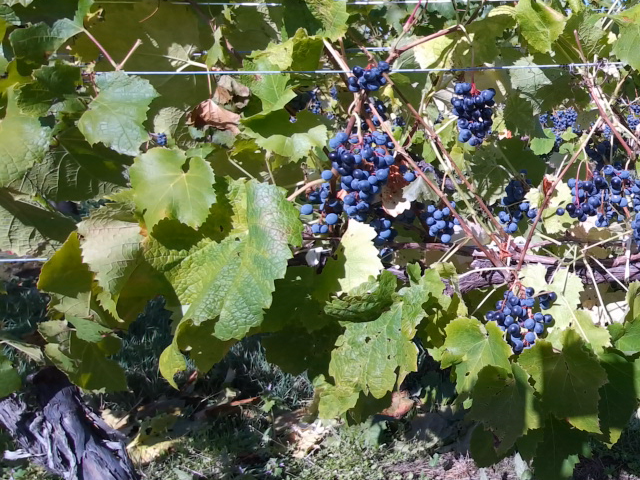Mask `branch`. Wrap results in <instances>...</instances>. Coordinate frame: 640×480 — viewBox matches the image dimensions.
Instances as JSON below:
<instances>
[{
    "mask_svg": "<svg viewBox=\"0 0 640 480\" xmlns=\"http://www.w3.org/2000/svg\"><path fill=\"white\" fill-rule=\"evenodd\" d=\"M382 77L385 79V81L390 84L392 90L396 93L397 97L399 98V100L401 101V103L408 109L409 112L413 113L416 117V119L420 122V124L423 126V128L427 131L428 135L430 136L428 138V142L430 147L432 148L433 152L436 155V158L439 161V164L442 168V170L444 171L446 177L448 178V180L451 182V184L455 187V189L457 190L460 198L465 202V204L467 205V207L469 208L472 217L475 220V223L484 231L486 232L487 236L492 240V242L499 248L500 251L504 250V246L503 244L494 236V234L491 232V230L485 226L476 210L474 205L470 202L469 198L465 195L464 191L462 190L461 186L458 184V182L454 179V177L452 176L450 170L448 169L447 165L445 164V161L443 159V157L441 156V154L447 159V161L449 162L450 166L456 171L458 172V174L462 177L464 183L466 184L468 190L470 191V193L473 195V197L475 198L477 204L479 205V207L481 208V210L486 214L487 218L489 219V221L491 222V224L498 229L499 235L510 244L511 247H513L515 249L516 252H519L521 254V258L518 261L516 267L514 268V270L512 271V278H515L518 274V272L520 271L522 265H523V261L525 259V255L526 252L530 246L531 243V238L534 232L535 227L538 225V222L540 220L541 214L545 208V206L547 205V203L549 202V199L551 198L552 194L554 193L556 187L559 185V183L561 182V180L564 178V175L566 174V172L569 170V168L571 167V165L574 163V161L580 156V154L584 151V149L587 147L588 143L590 142L594 132L597 129L598 123L603 120L605 122V124L607 125V127L609 128L610 132L612 135H614L617 139H619V141L621 142L624 150L626 151V153L628 154V156L630 157V159L632 161L636 160V156L633 153V151L630 149L626 139L618 132L615 130L612 122L608 119V117L606 116V114L602 111L600 103H599V99L597 98V95L595 93V90L593 88V86L588 82L587 79H583L582 83L584 84V86L588 89L591 98L594 102L596 111L598 113L599 116H597L592 124V127L590 128V130L587 133V136L585 137L584 142L580 145V147L575 151V153L571 156V158L567 161V163L565 164V166L562 168L561 172L559 173V175L557 176V178L555 179V181L553 182V184L550 186L549 190L547 191L543 201L541 202L539 208L536 211L534 220L532 222V224L529 227V230L527 232L526 238H525V243L524 246L521 248L519 247L509 236H507L504 232V229L502 227L501 224H499L495 218L492 216L491 212L488 210V208L486 207V205L483 203L482 199L480 198V196L478 195V193L476 192V190L473 188L471 181L469 180L468 176L466 175V173L454 162L453 158L450 156V154L444 149V147L442 146L441 142L439 141L438 137L435 135V133L433 132L432 128L425 122V120L423 119V117L420 115L419 111L416 110L415 108H413L408 102L407 100L404 98L403 94L401 93V91L399 90V88L397 87V85L395 84V82L390 78V76L386 73L383 72L382 73Z\"/></svg>",
    "mask_w": 640,
    "mask_h": 480,
    "instance_id": "branch-1",
    "label": "branch"
},
{
    "mask_svg": "<svg viewBox=\"0 0 640 480\" xmlns=\"http://www.w3.org/2000/svg\"><path fill=\"white\" fill-rule=\"evenodd\" d=\"M369 95H370V91L369 90L364 91L363 94L361 95L356 108L353 110L352 114L350 115L349 124H348V126L346 128V133L347 134L351 133V131L353 129V126H354L355 118L360 112H361V119L363 121L367 122L368 127L372 131L376 130V127L374 126L371 118L366 114V109L364 108V105L366 104L368 109H369V111L380 122L383 131L385 132L388 140L390 141L391 145L395 148L397 153L406 161V163L410 166V168L413 169L417 173V175L421 179H423L433 189V191L438 196V198L440 200H442L444 202V204L447 206V209L450 211L451 215L454 216L458 220L460 226L466 232V234L468 235L469 239L476 246H478L482 252L485 253V257H487L494 264H496L498 268H501L502 267V262L500 260H498L496 257H494L490 252H488L485 249L484 245L481 244V242L473 235L472 231L468 228V226L466 225V223L463 220L462 216L457 211H455V209L453 208L451 202L442 194V192L437 187V185L433 181H431L430 178L427 177L420 170V168L416 164L413 163V161L407 156V154L402 150V148L396 143V141L393 138L388 126L386 125L385 120L381 117L380 113L373 107V104L371 103L370 99L368 98Z\"/></svg>",
    "mask_w": 640,
    "mask_h": 480,
    "instance_id": "branch-2",
    "label": "branch"
},
{
    "mask_svg": "<svg viewBox=\"0 0 640 480\" xmlns=\"http://www.w3.org/2000/svg\"><path fill=\"white\" fill-rule=\"evenodd\" d=\"M463 27H464V24H463V23H458V24H456V25H454V26L446 27V28H444V29H442V30H439V31L435 32L434 34H432V35H430V36H428V37H426V38H423V39H420V40H418V41H415V42H412V43L406 44V45H404V46L400 47L399 49H395V50H393V51L389 54V56L386 58V62H387L388 64H391V63L394 61V59H395L396 57H398L400 54H402L404 51H406V50H408V49H412V48L417 47V46H420V45H422V44L429 43V42H431V41H433V40L437 39V38H438V37H440L441 35H444V34L449 33V32L456 31V30H458V29H460V28H463Z\"/></svg>",
    "mask_w": 640,
    "mask_h": 480,
    "instance_id": "branch-3",
    "label": "branch"
},
{
    "mask_svg": "<svg viewBox=\"0 0 640 480\" xmlns=\"http://www.w3.org/2000/svg\"><path fill=\"white\" fill-rule=\"evenodd\" d=\"M347 33L349 35H351L355 39V41L358 43V45H359L361 51L363 52V55L365 56V58L368 59L372 63L373 66H377L378 62L369 54L365 44L363 43V41L361 40L359 35L356 32H354L352 29H348Z\"/></svg>",
    "mask_w": 640,
    "mask_h": 480,
    "instance_id": "branch-4",
    "label": "branch"
},
{
    "mask_svg": "<svg viewBox=\"0 0 640 480\" xmlns=\"http://www.w3.org/2000/svg\"><path fill=\"white\" fill-rule=\"evenodd\" d=\"M632 73L631 69H628L620 78V80L617 82L616 86L613 88V90L610 93L609 96V100L608 103L609 104H613L614 103V98L616 96V94L618 93V91L620 90V88L622 87V85L625 83V80L627 79V77Z\"/></svg>",
    "mask_w": 640,
    "mask_h": 480,
    "instance_id": "branch-5",
    "label": "branch"
},
{
    "mask_svg": "<svg viewBox=\"0 0 640 480\" xmlns=\"http://www.w3.org/2000/svg\"><path fill=\"white\" fill-rule=\"evenodd\" d=\"M331 173L333 175V178H332V180L330 182L331 194L329 195V198L333 199L336 196V186L335 185H336V183H337V181L339 179V174H338V172H337L335 167L331 168Z\"/></svg>",
    "mask_w": 640,
    "mask_h": 480,
    "instance_id": "branch-6",
    "label": "branch"
},
{
    "mask_svg": "<svg viewBox=\"0 0 640 480\" xmlns=\"http://www.w3.org/2000/svg\"><path fill=\"white\" fill-rule=\"evenodd\" d=\"M323 52L327 55V57L332 62L334 69H341V67L338 64L337 59L334 57V55L331 53V51L327 47L323 48Z\"/></svg>",
    "mask_w": 640,
    "mask_h": 480,
    "instance_id": "branch-7",
    "label": "branch"
}]
</instances>
